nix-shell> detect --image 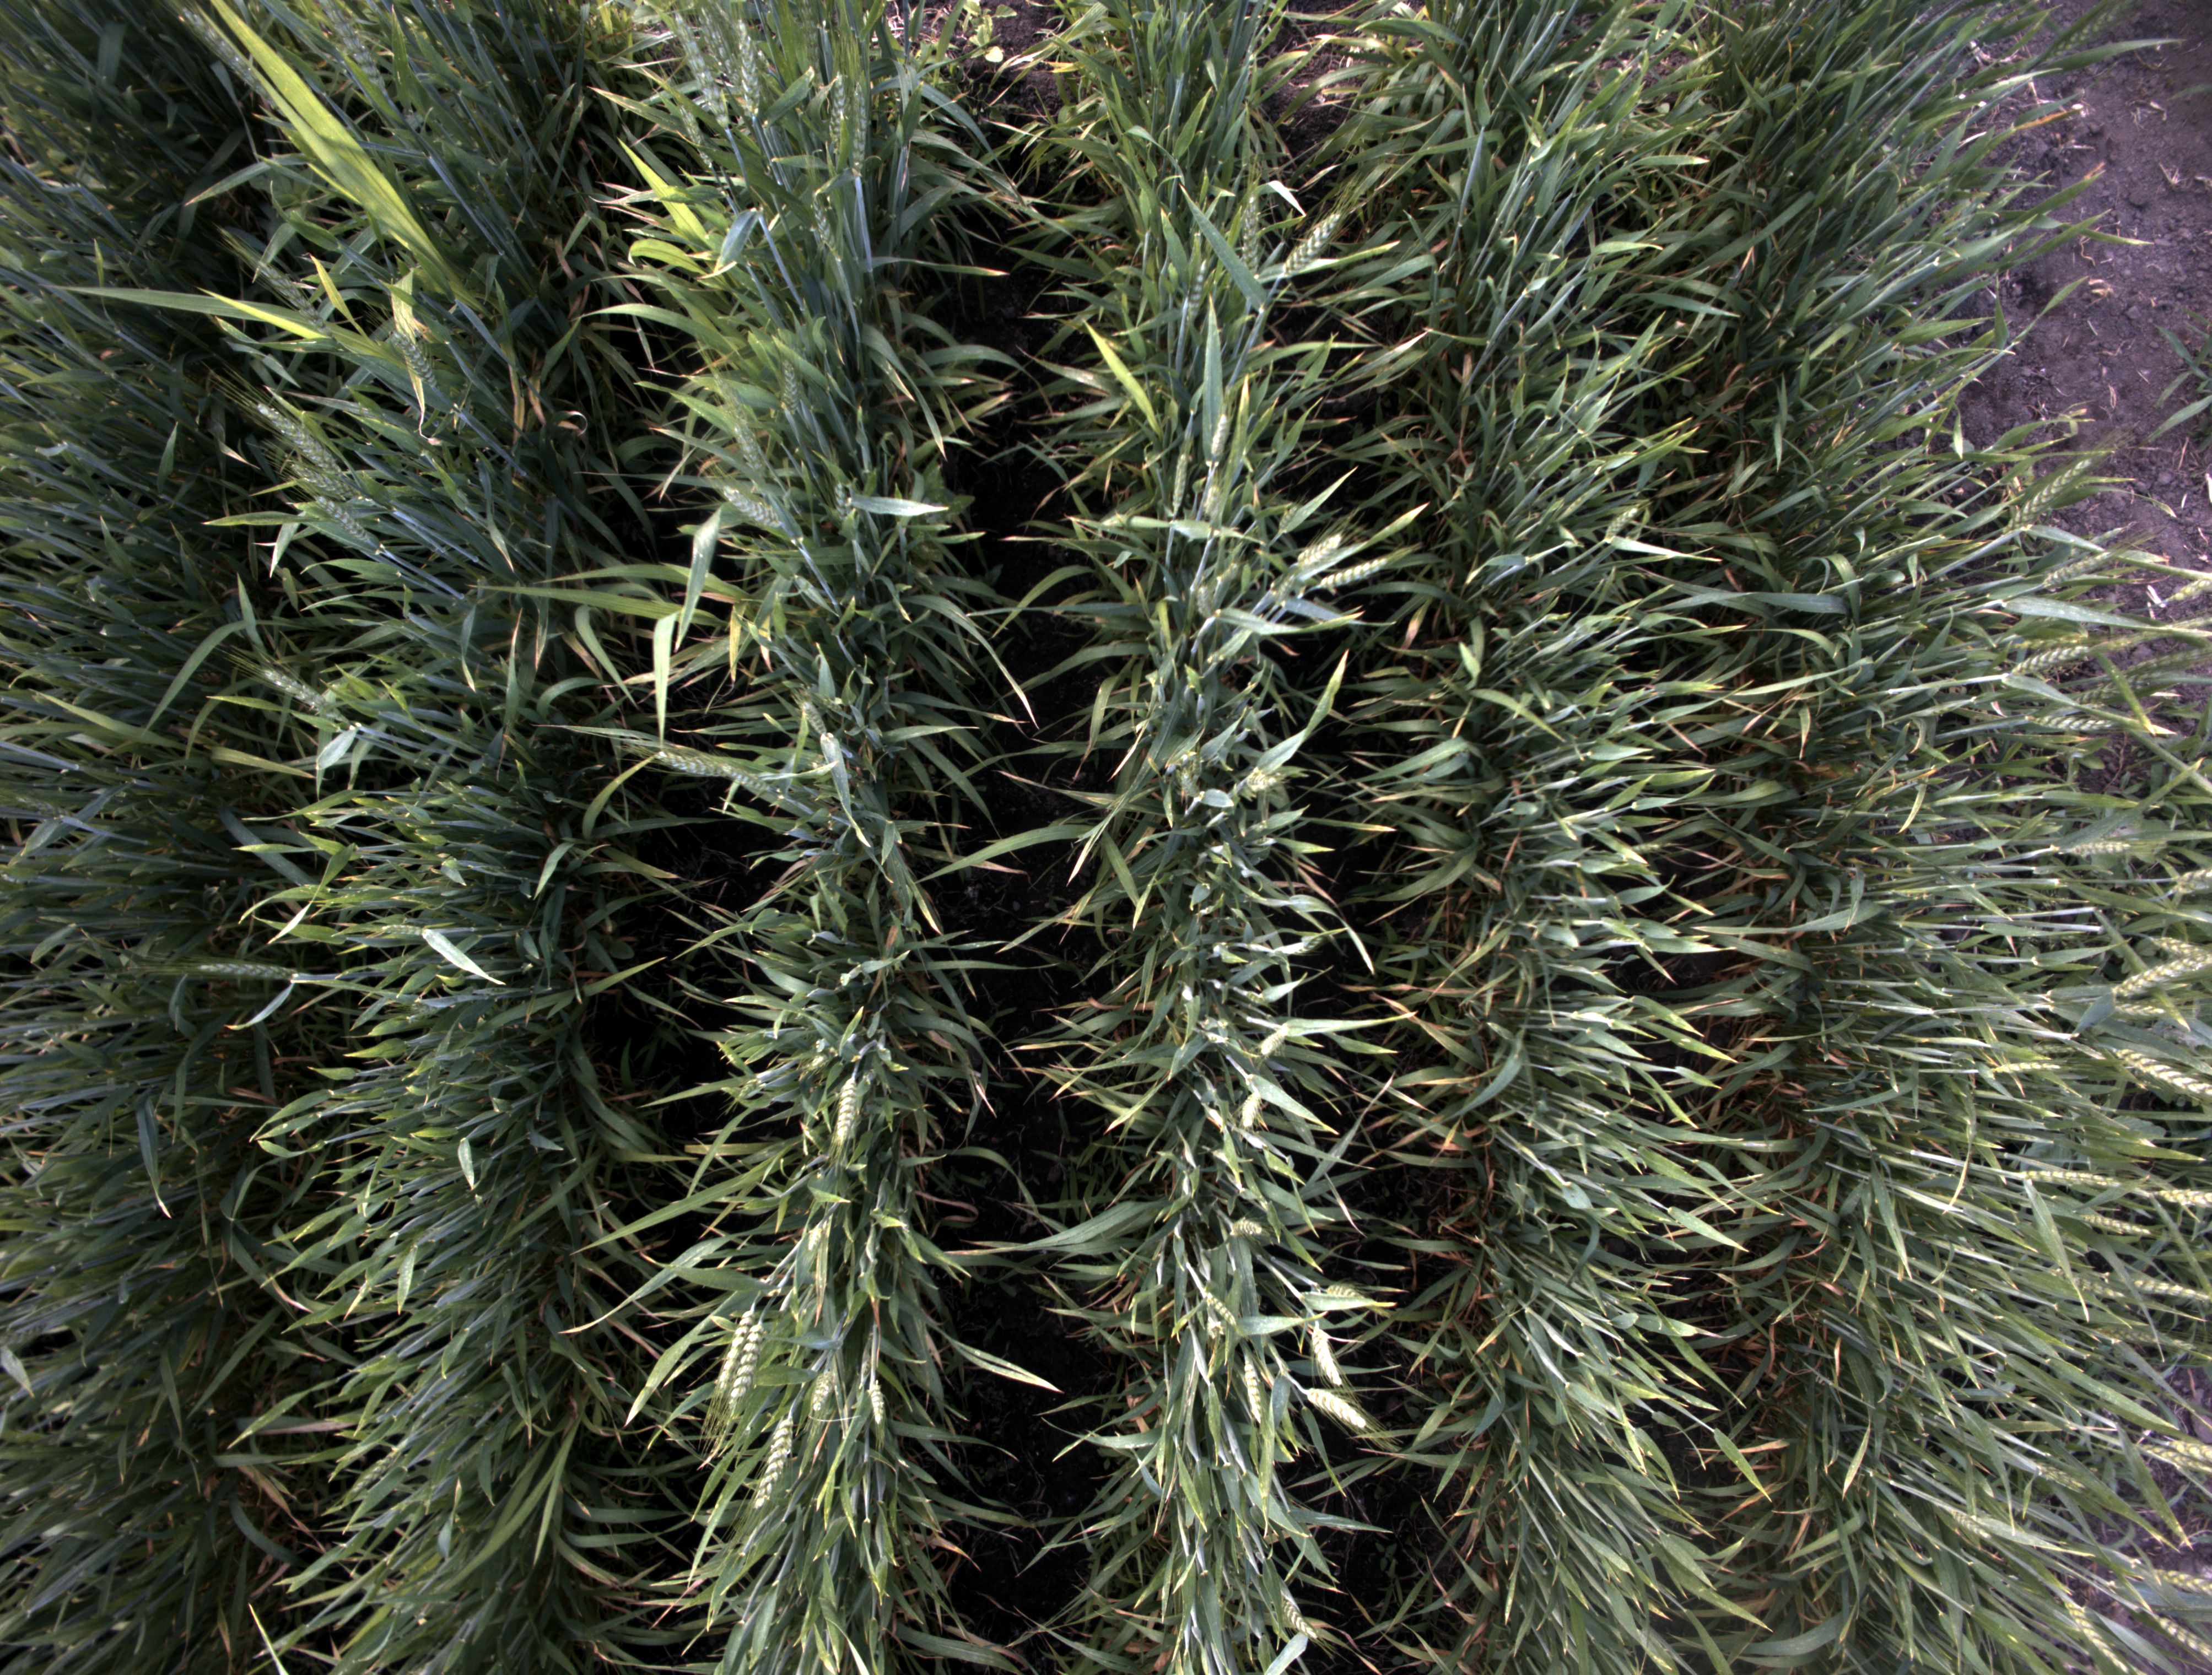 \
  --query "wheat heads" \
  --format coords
[0,1321,48,1346]
[699,16,721,63]
[2151,1567,2211,1595]
[1247,774,1277,787]
[2153,935,2205,955]
[1319,558,1387,589]
[718,6,772,75]
[2058,1266,2125,1298]
[1220,563,1239,583]
[1606,506,1638,539]
[2035,1461,2086,1493]
[2178,881,2209,894]
[1611,726,1638,738]
[2079,1213,2151,1236]
[1297,533,1342,568]
[2033,715,2114,733]
[2153,1613,2210,1657]
[811,1370,837,1412]
[1569,487,1593,509]
[2114,1043,2200,1096]
[407,1010,436,1025]
[821,694,844,714]
[699,6,741,82]
[25,977,71,989]
[2115,1005,2166,1017]
[1243,1357,1262,1424]
[199,963,297,981]
[351,1448,401,1493]
[720,482,782,531]
[2124,647,2209,676]
[714,371,746,420]
[2074,673,2163,703]
[1180,766,1201,796]
[255,400,343,478]
[1952,1509,1991,1539]
[679,106,714,167]
[1204,485,1221,515]
[1281,1596,1318,1640]
[180,5,287,117]
[2143,617,2210,641]
[317,0,387,94]
[673,10,732,128]
[381,923,422,936]
[870,1383,885,1426]
[261,668,342,719]
[829,69,844,138]
[2117,997,2160,1008]
[410,1003,431,1013]
[257,259,333,337]
[2153,1186,2212,1207]
[720,764,772,791]
[2171,1439,2212,1459]
[2172,574,2211,602]
[798,698,827,734]
[50,1023,84,1033]
[2142,1443,2211,1474]
[1242,194,1259,273]
[736,18,761,114]
[1311,1327,1343,1384]
[799,1,824,71]
[2044,6,2119,61]
[740,1076,762,1099]
[1282,212,1343,276]
[2088,526,2122,545]
[834,481,847,519]
[2021,1167,2122,1189]
[2178,867,2211,882]
[2072,842,2132,856]
[2133,1279,2210,1303]
[1241,1092,1260,1128]
[755,1418,795,1509]
[1260,1027,1288,1055]
[810,193,838,252]
[51,34,85,72]
[781,358,800,413]
[13,795,75,818]
[1196,584,1216,617]
[2010,647,2090,676]
[1629,843,1660,853]
[1247,992,1266,1007]
[2003,457,2092,535]
[313,495,370,543]
[852,80,867,177]
[1186,259,1207,322]
[2026,1043,2079,1055]
[834,1077,858,1138]
[1192,754,1203,777]
[1326,1284,1357,1296]
[1305,1384,1366,1429]
[1895,181,1931,214]
[1216,1016,1229,1029]
[2014,633,2081,648]
[412,1227,436,1248]
[2064,1599,2129,1673]
[1171,452,1189,508]
[397,897,426,904]
[730,1323,765,1402]
[2112,953,2210,996]
[1939,371,1972,400]
[392,327,438,388]
[2041,553,2111,588]
[719,1309,754,1389]
[801,1052,829,1071]
[653,749,727,777]
[1594,6,1625,56]
[1276,574,1295,602]
[1993,1063,2061,1073]
[1278,508,1298,529]
[1207,1292,1237,1327]
[808,1228,824,1251]
[733,425,763,471]
[2097,1326,2161,1344]
[290,462,377,508]
[1232,1214,1262,1235]
[1295,936,1323,954]
[1611,936,1635,944]
[1210,412,1230,456]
